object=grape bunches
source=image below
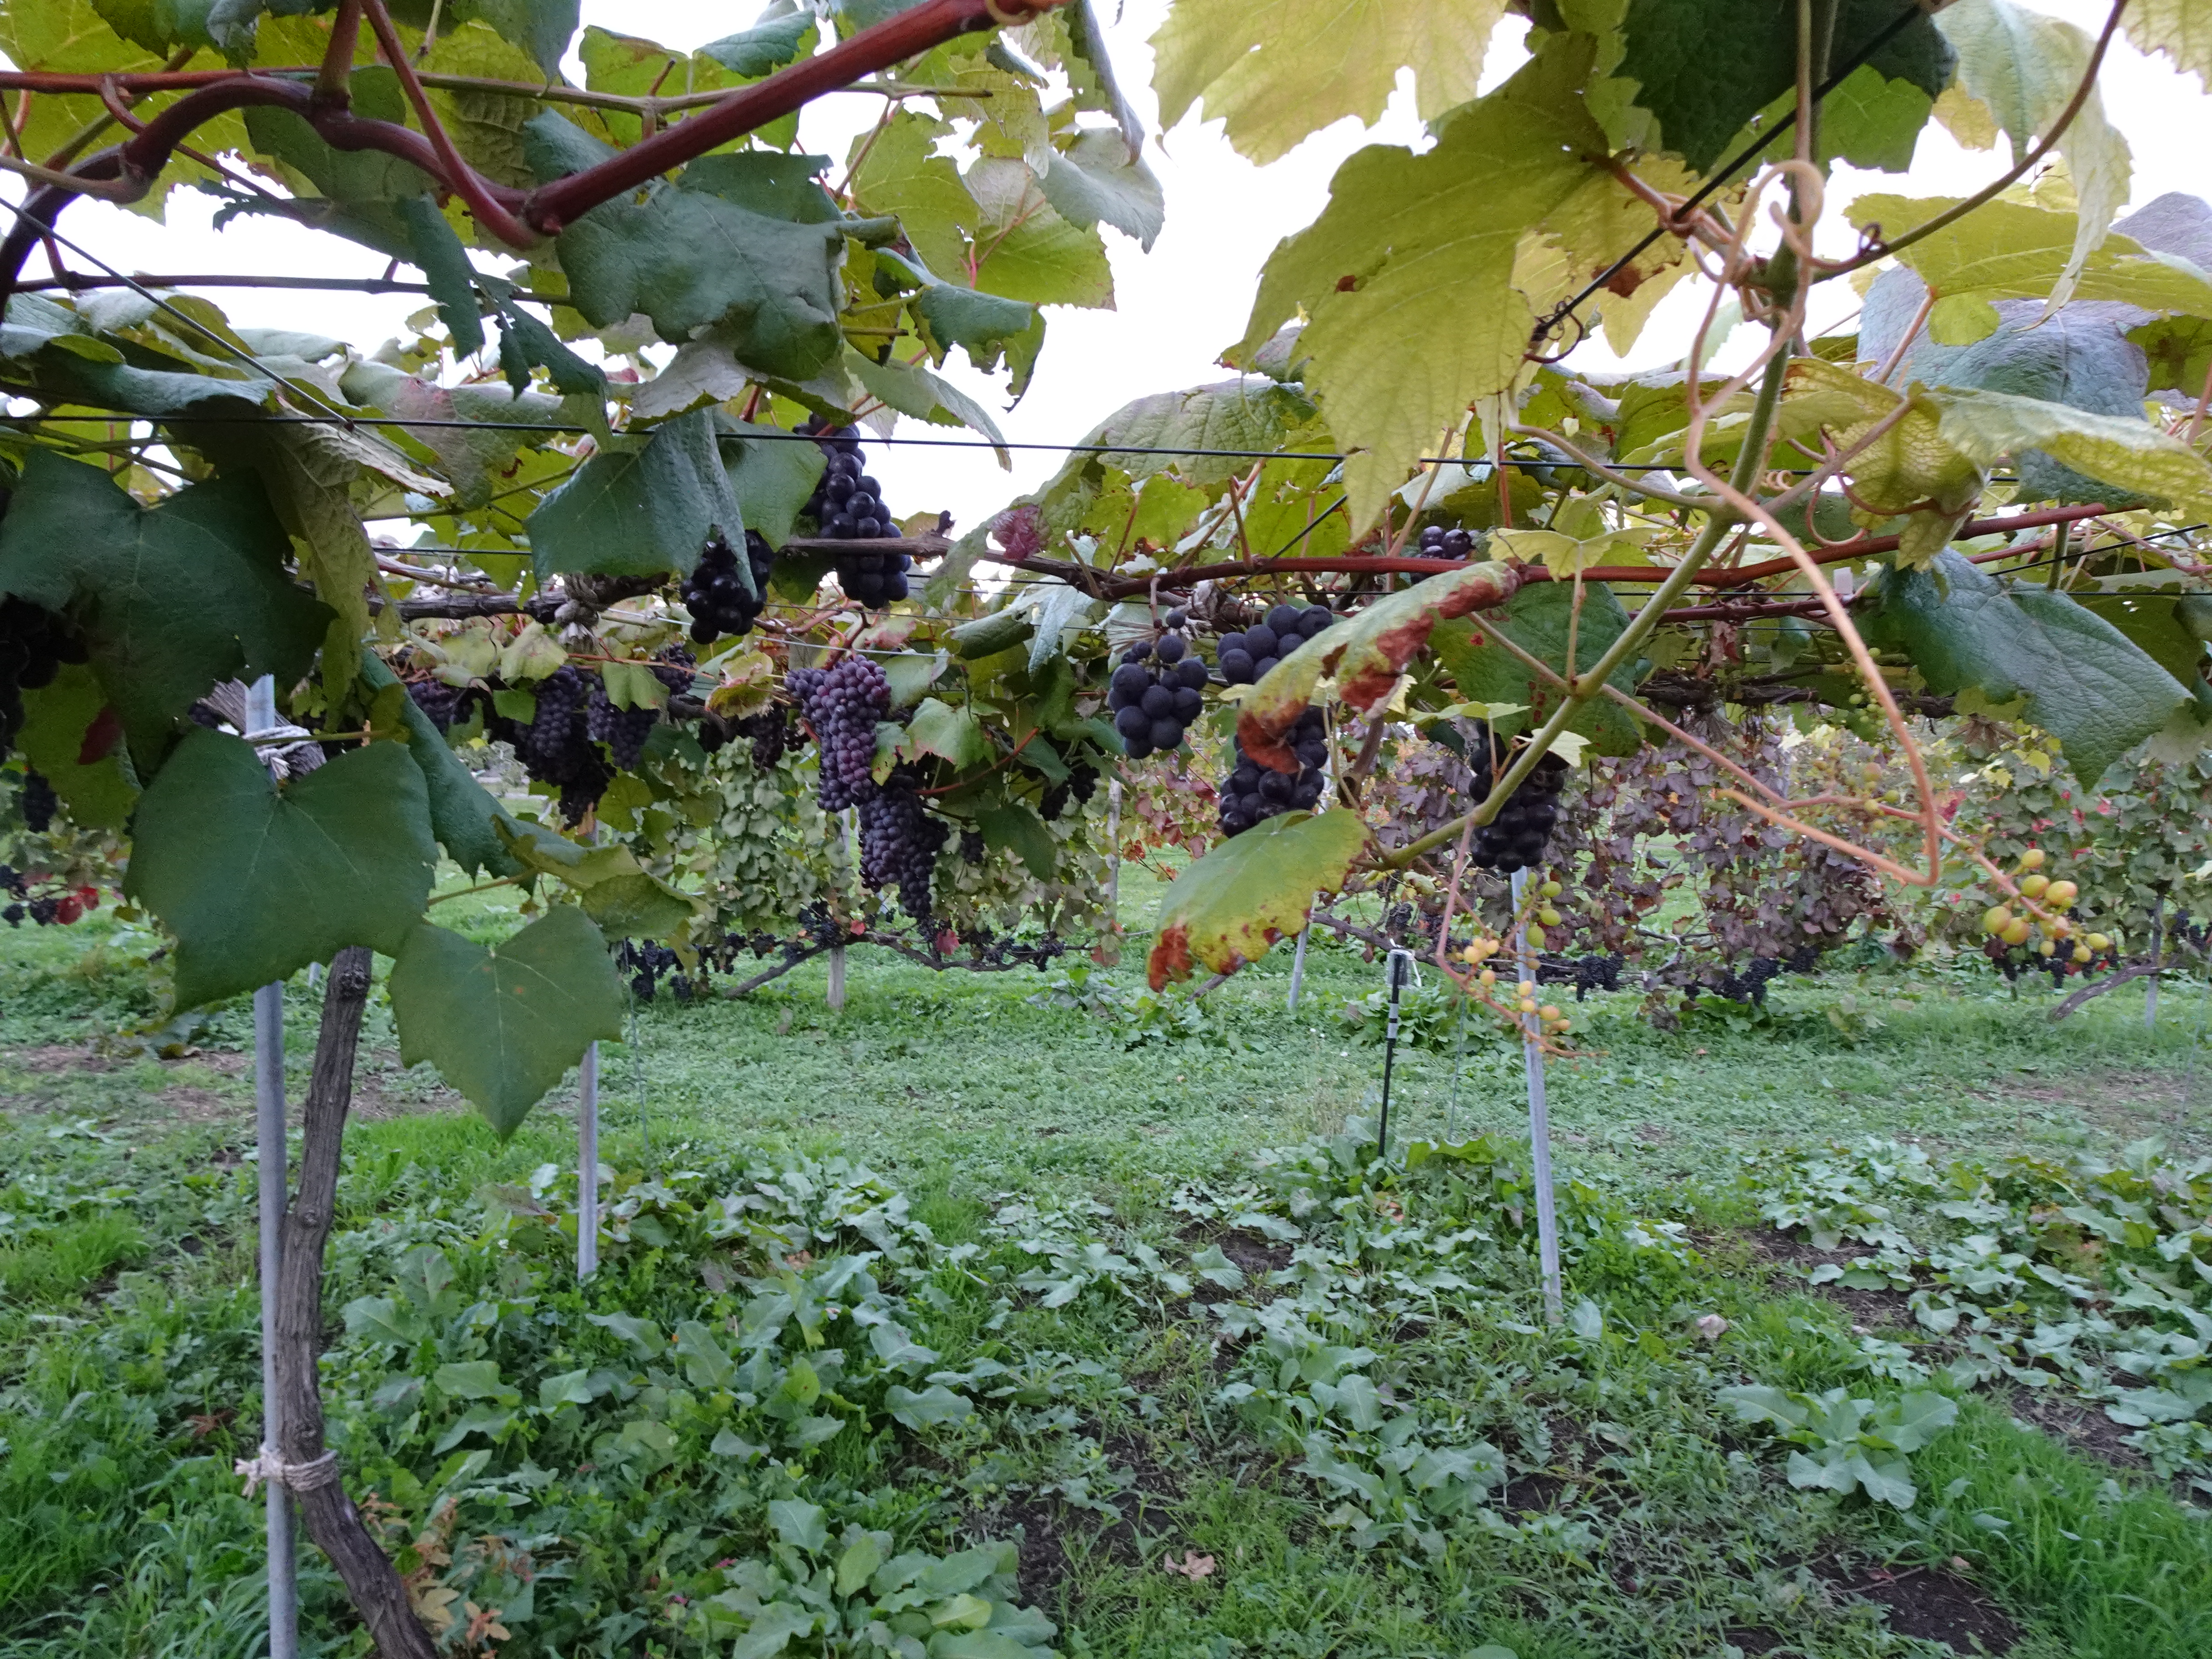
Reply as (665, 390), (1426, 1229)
(811, 916), (848, 951)
(633, 938), (675, 976)
(27, 892), (60, 929)
(20, 769), (58, 835)
(783, 666), (852, 814)
(1218, 603), (1334, 708)
(749, 708), (785, 775)
(865, 768), (921, 886)
(1419, 526), (1475, 585)
(526, 670), (585, 761)
(557, 741), (616, 831)
(1218, 704), (1332, 837)
(697, 722), (727, 755)
(1068, 759), (1102, 807)
(746, 926), (781, 962)
(900, 817), (951, 920)
(1463, 934), (1499, 987)
(1515, 980), (1574, 1033)
(586, 677), (617, 741)
(1736, 976), (1781, 1009)
(679, 529), (775, 645)
(792, 411), (911, 608)
(818, 655), (891, 806)
(1978, 846), (2118, 976)
(711, 931), (747, 976)
(957, 829), (984, 865)
(1036, 779), (1070, 824)
(1635, 986), (1671, 1023)
(410, 684), (474, 741)
(1512, 873), (1562, 948)
(1107, 607), (1210, 760)
(858, 832), (883, 892)
(1466, 719), (1570, 872)
(1813, 744), (1901, 839)
(1740, 955), (1783, 976)
(603, 700), (661, 772)
(1035, 930), (1068, 966)
(651, 643), (697, 696)
(666, 976), (701, 1002)
(1678, 977), (1705, 1013)
(1788, 941), (1822, 975)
